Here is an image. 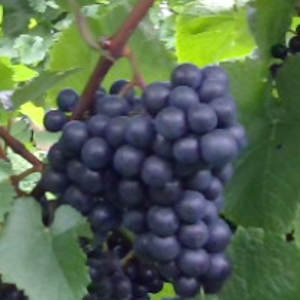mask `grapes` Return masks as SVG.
Returning a JSON list of instances; mask_svg holds the SVG:
<instances>
[{
    "label": "grapes",
    "mask_w": 300,
    "mask_h": 300,
    "mask_svg": "<svg viewBox=\"0 0 300 300\" xmlns=\"http://www.w3.org/2000/svg\"><path fill=\"white\" fill-rule=\"evenodd\" d=\"M229 89L224 68L183 63L168 82L116 80L109 95L99 87L74 121L64 113L80 96L64 88L60 110L43 117L46 131L63 132L44 184L94 228L124 220L138 255L158 260L184 298L218 292L232 269V227L217 213L249 132L236 124Z\"/></svg>",
    "instance_id": "obj_1"
}]
</instances>
